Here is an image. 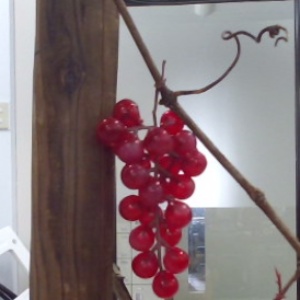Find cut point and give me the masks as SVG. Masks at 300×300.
Masks as SVG:
<instances>
[{
	"mask_svg": "<svg viewBox=\"0 0 300 300\" xmlns=\"http://www.w3.org/2000/svg\"><path fill=\"white\" fill-rule=\"evenodd\" d=\"M154 87H155V96H154V106H153V109H152V117H153V125L157 126L156 112H157V104H158V98H159L158 83H155Z\"/></svg>",
	"mask_w": 300,
	"mask_h": 300,
	"instance_id": "obj_1",
	"label": "cut point"
}]
</instances>
